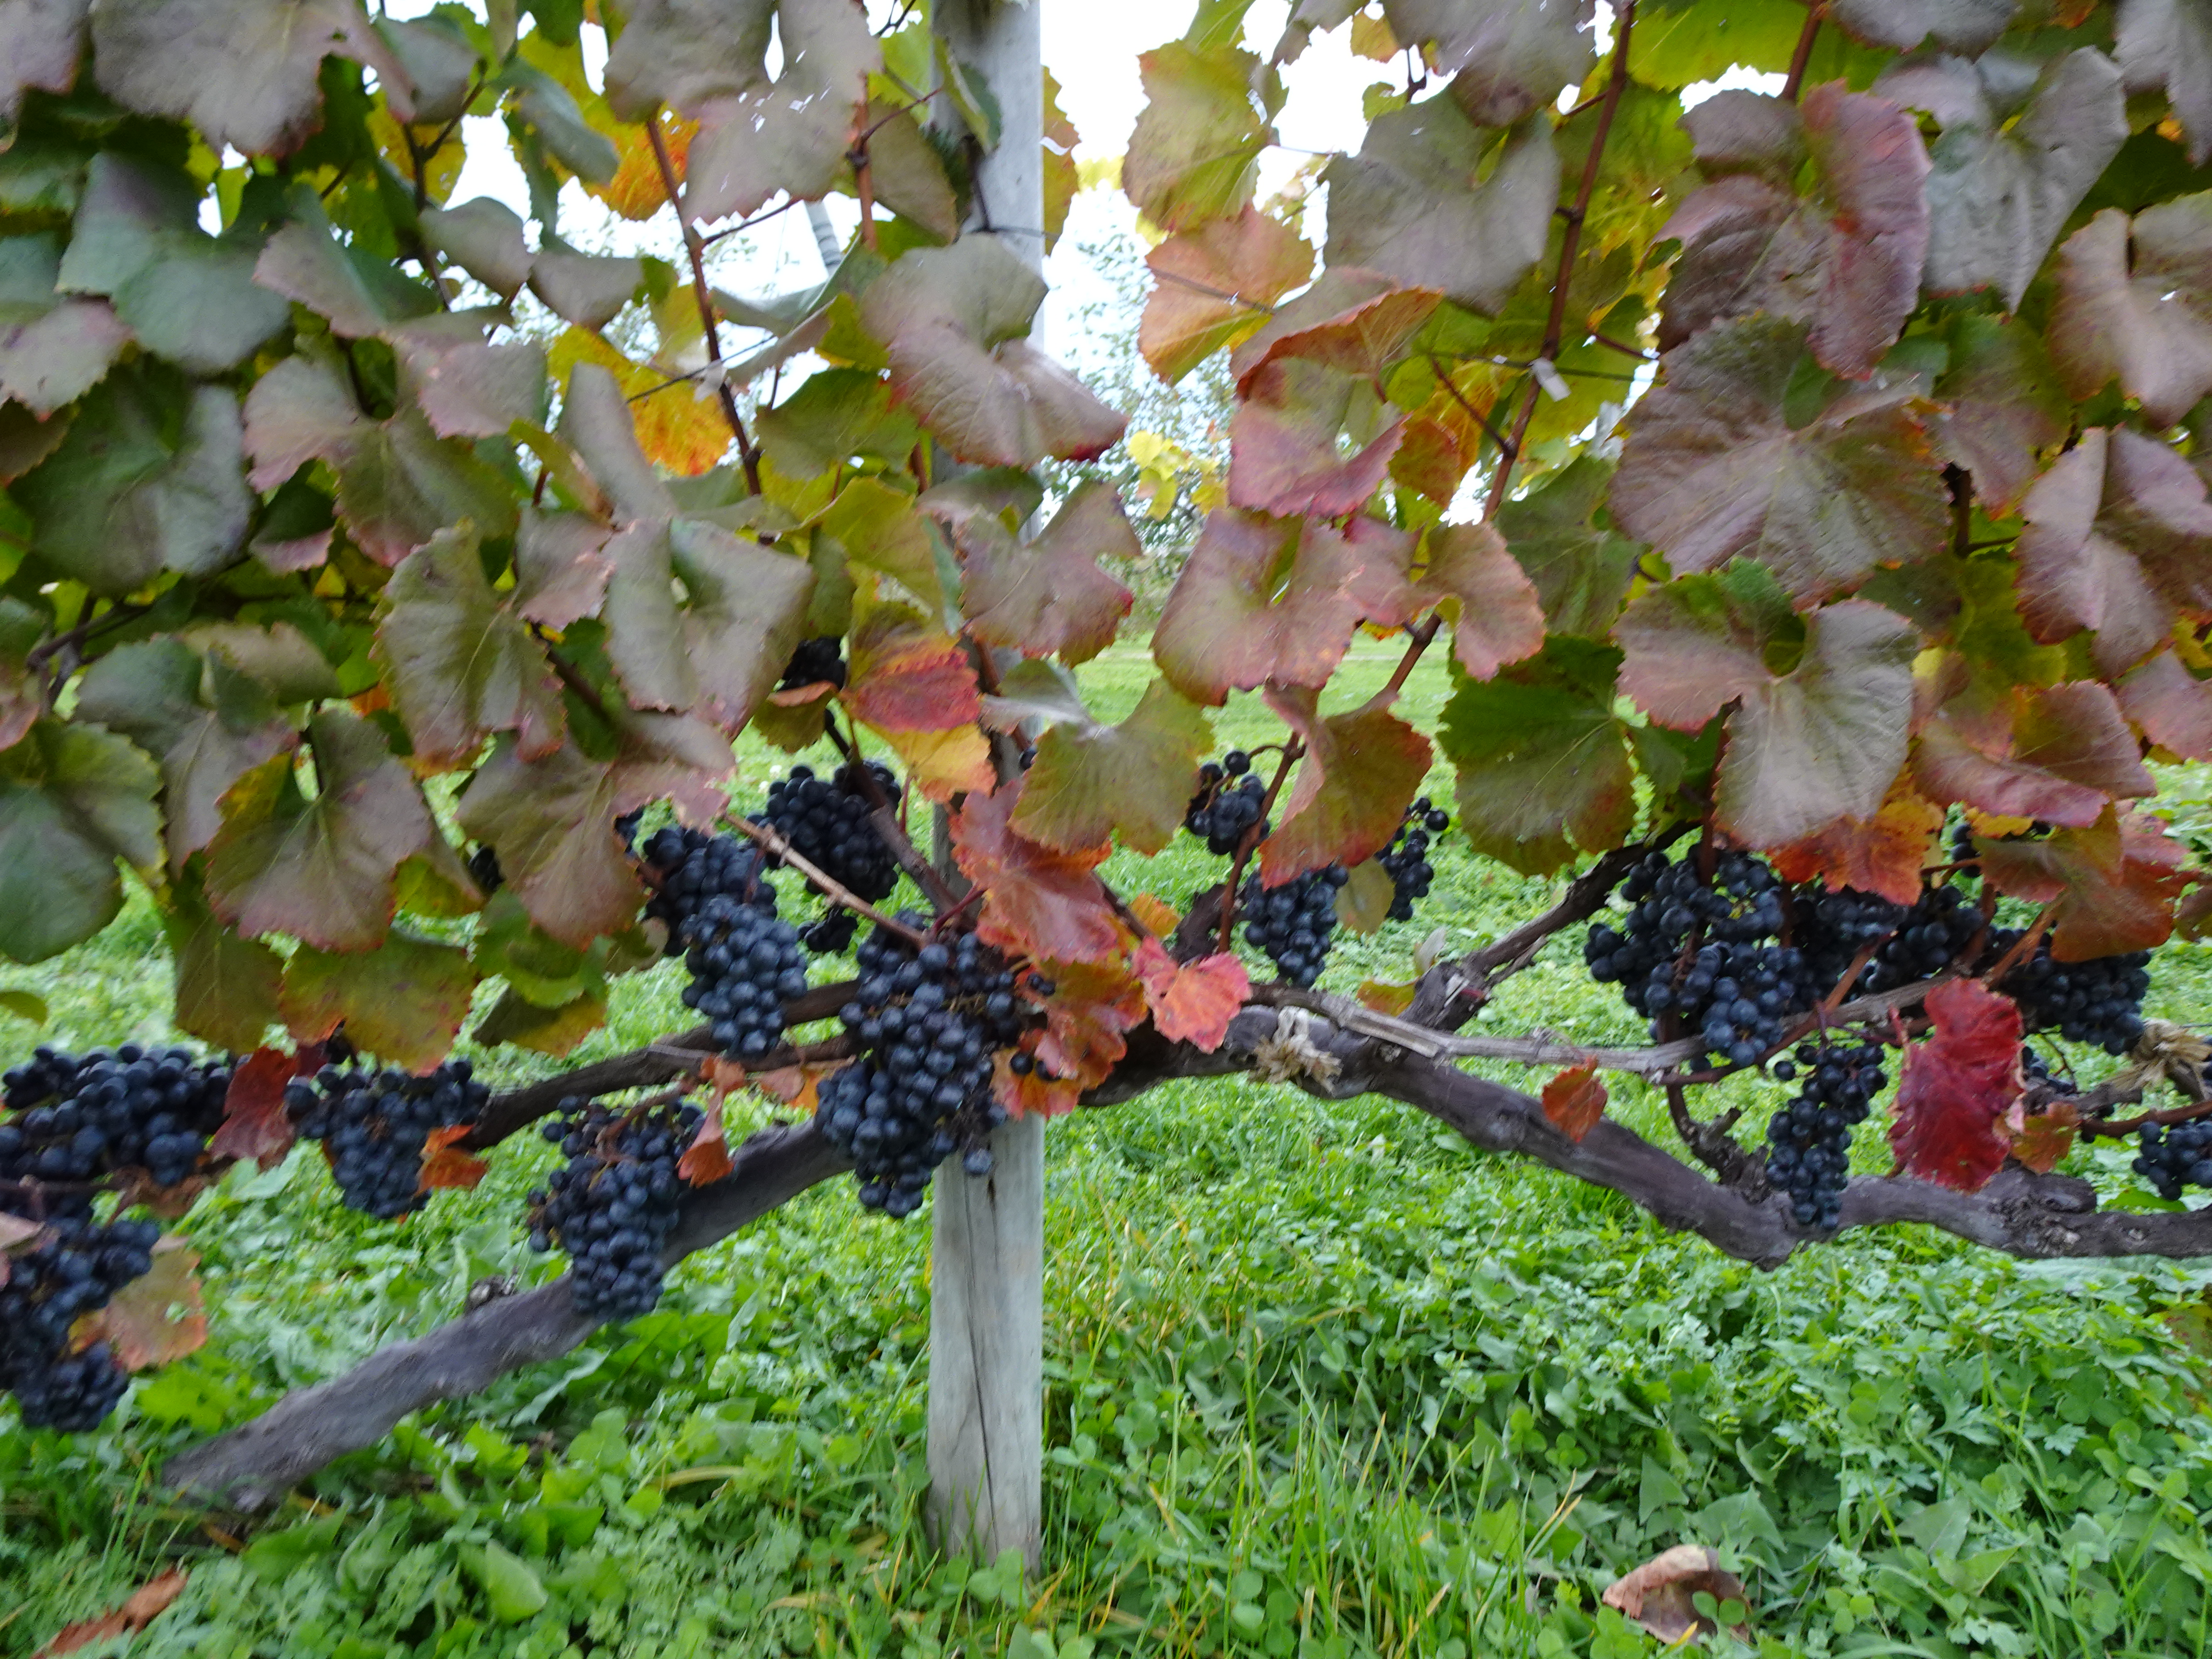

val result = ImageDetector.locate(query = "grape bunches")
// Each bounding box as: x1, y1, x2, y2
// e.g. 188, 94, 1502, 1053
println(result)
817, 1060, 948, 1221
1583, 922, 1711, 1073
857, 906, 1061, 1084
1179, 750, 1271, 865
611, 805, 776, 954
837, 997, 999, 1177
748, 766, 902, 905
799, 763, 902, 956
5, 1198, 162, 1437
1372, 796, 1449, 922
777, 635, 846, 690
1700, 942, 1800, 1070
1622, 852, 1684, 937
1863, 886, 1997, 999
527, 1095, 711, 1318
1782, 883, 1862, 1012
1672, 843, 1789, 945
2131, 1111, 2212, 1202
677, 893, 808, 1061
0, 1043, 322, 1224
1814, 876, 1912, 945
1018, 745, 1037, 771
2020, 1045, 2115, 1143
309, 1028, 493, 1218
470, 846, 506, 892
1765, 1036, 1888, 1232
1948, 814, 2053, 897
2033, 947, 2165, 1058
1838, 964, 1935, 1044
1968, 917, 2059, 1040
1643, 888, 1736, 1025
1242, 858, 1348, 992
